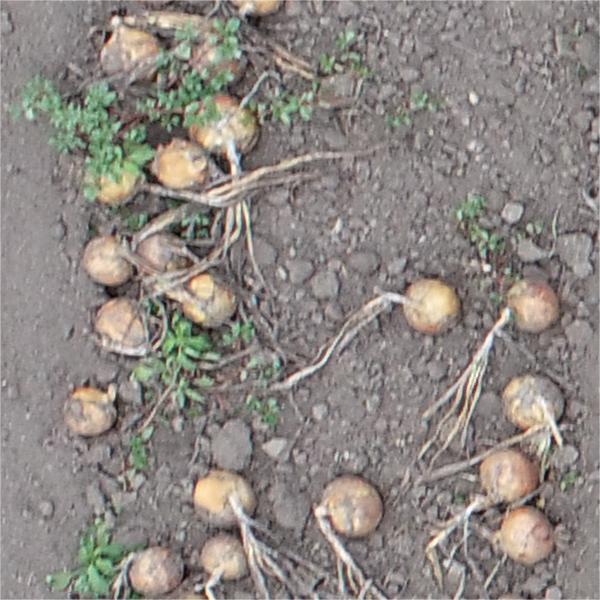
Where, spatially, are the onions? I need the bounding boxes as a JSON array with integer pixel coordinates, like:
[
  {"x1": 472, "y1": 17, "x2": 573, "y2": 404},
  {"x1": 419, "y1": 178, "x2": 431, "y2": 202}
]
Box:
[
  {"x1": 94, "y1": 296, "x2": 145, "y2": 348},
  {"x1": 237, "y1": 0, "x2": 280, "y2": 15},
  {"x1": 187, "y1": 93, "x2": 256, "y2": 156},
  {"x1": 498, "y1": 506, "x2": 554, "y2": 562},
  {"x1": 63, "y1": 387, "x2": 113, "y2": 436},
  {"x1": 176, "y1": 271, "x2": 234, "y2": 324},
  {"x1": 82, "y1": 235, "x2": 134, "y2": 287},
  {"x1": 506, "y1": 276, "x2": 557, "y2": 330},
  {"x1": 192, "y1": 470, "x2": 254, "y2": 517},
  {"x1": 97, "y1": 165, "x2": 142, "y2": 203},
  {"x1": 102, "y1": 21, "x2": 158, "y2": 75},
  {"x1": 197, "y1": 535, "x2": 245, "y2": 586},
  {"x1": 155, "y1": 140, "x2": 206, "y2": 189},
  {"x1": 403, "y1": 279, "x2": 460, "y2": 332},
  {"x1": 481, "y1": 451, "x2": 533, "y2": 501},
  {"x1": 126, "y1": 545, "x2": 181, "y2": 594},
  {"x1": 319, "y1": 474, "x2": 382, "y2": 537},
  {"x1": 501, "y1": 373, "x2": 562, "y2": 431},
  {"x1": 195, "y1": 41, "x2": 246, "y2": 84},
  {"x1": 137, "y1": 232, "x2": 192, "y2": 272}
]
